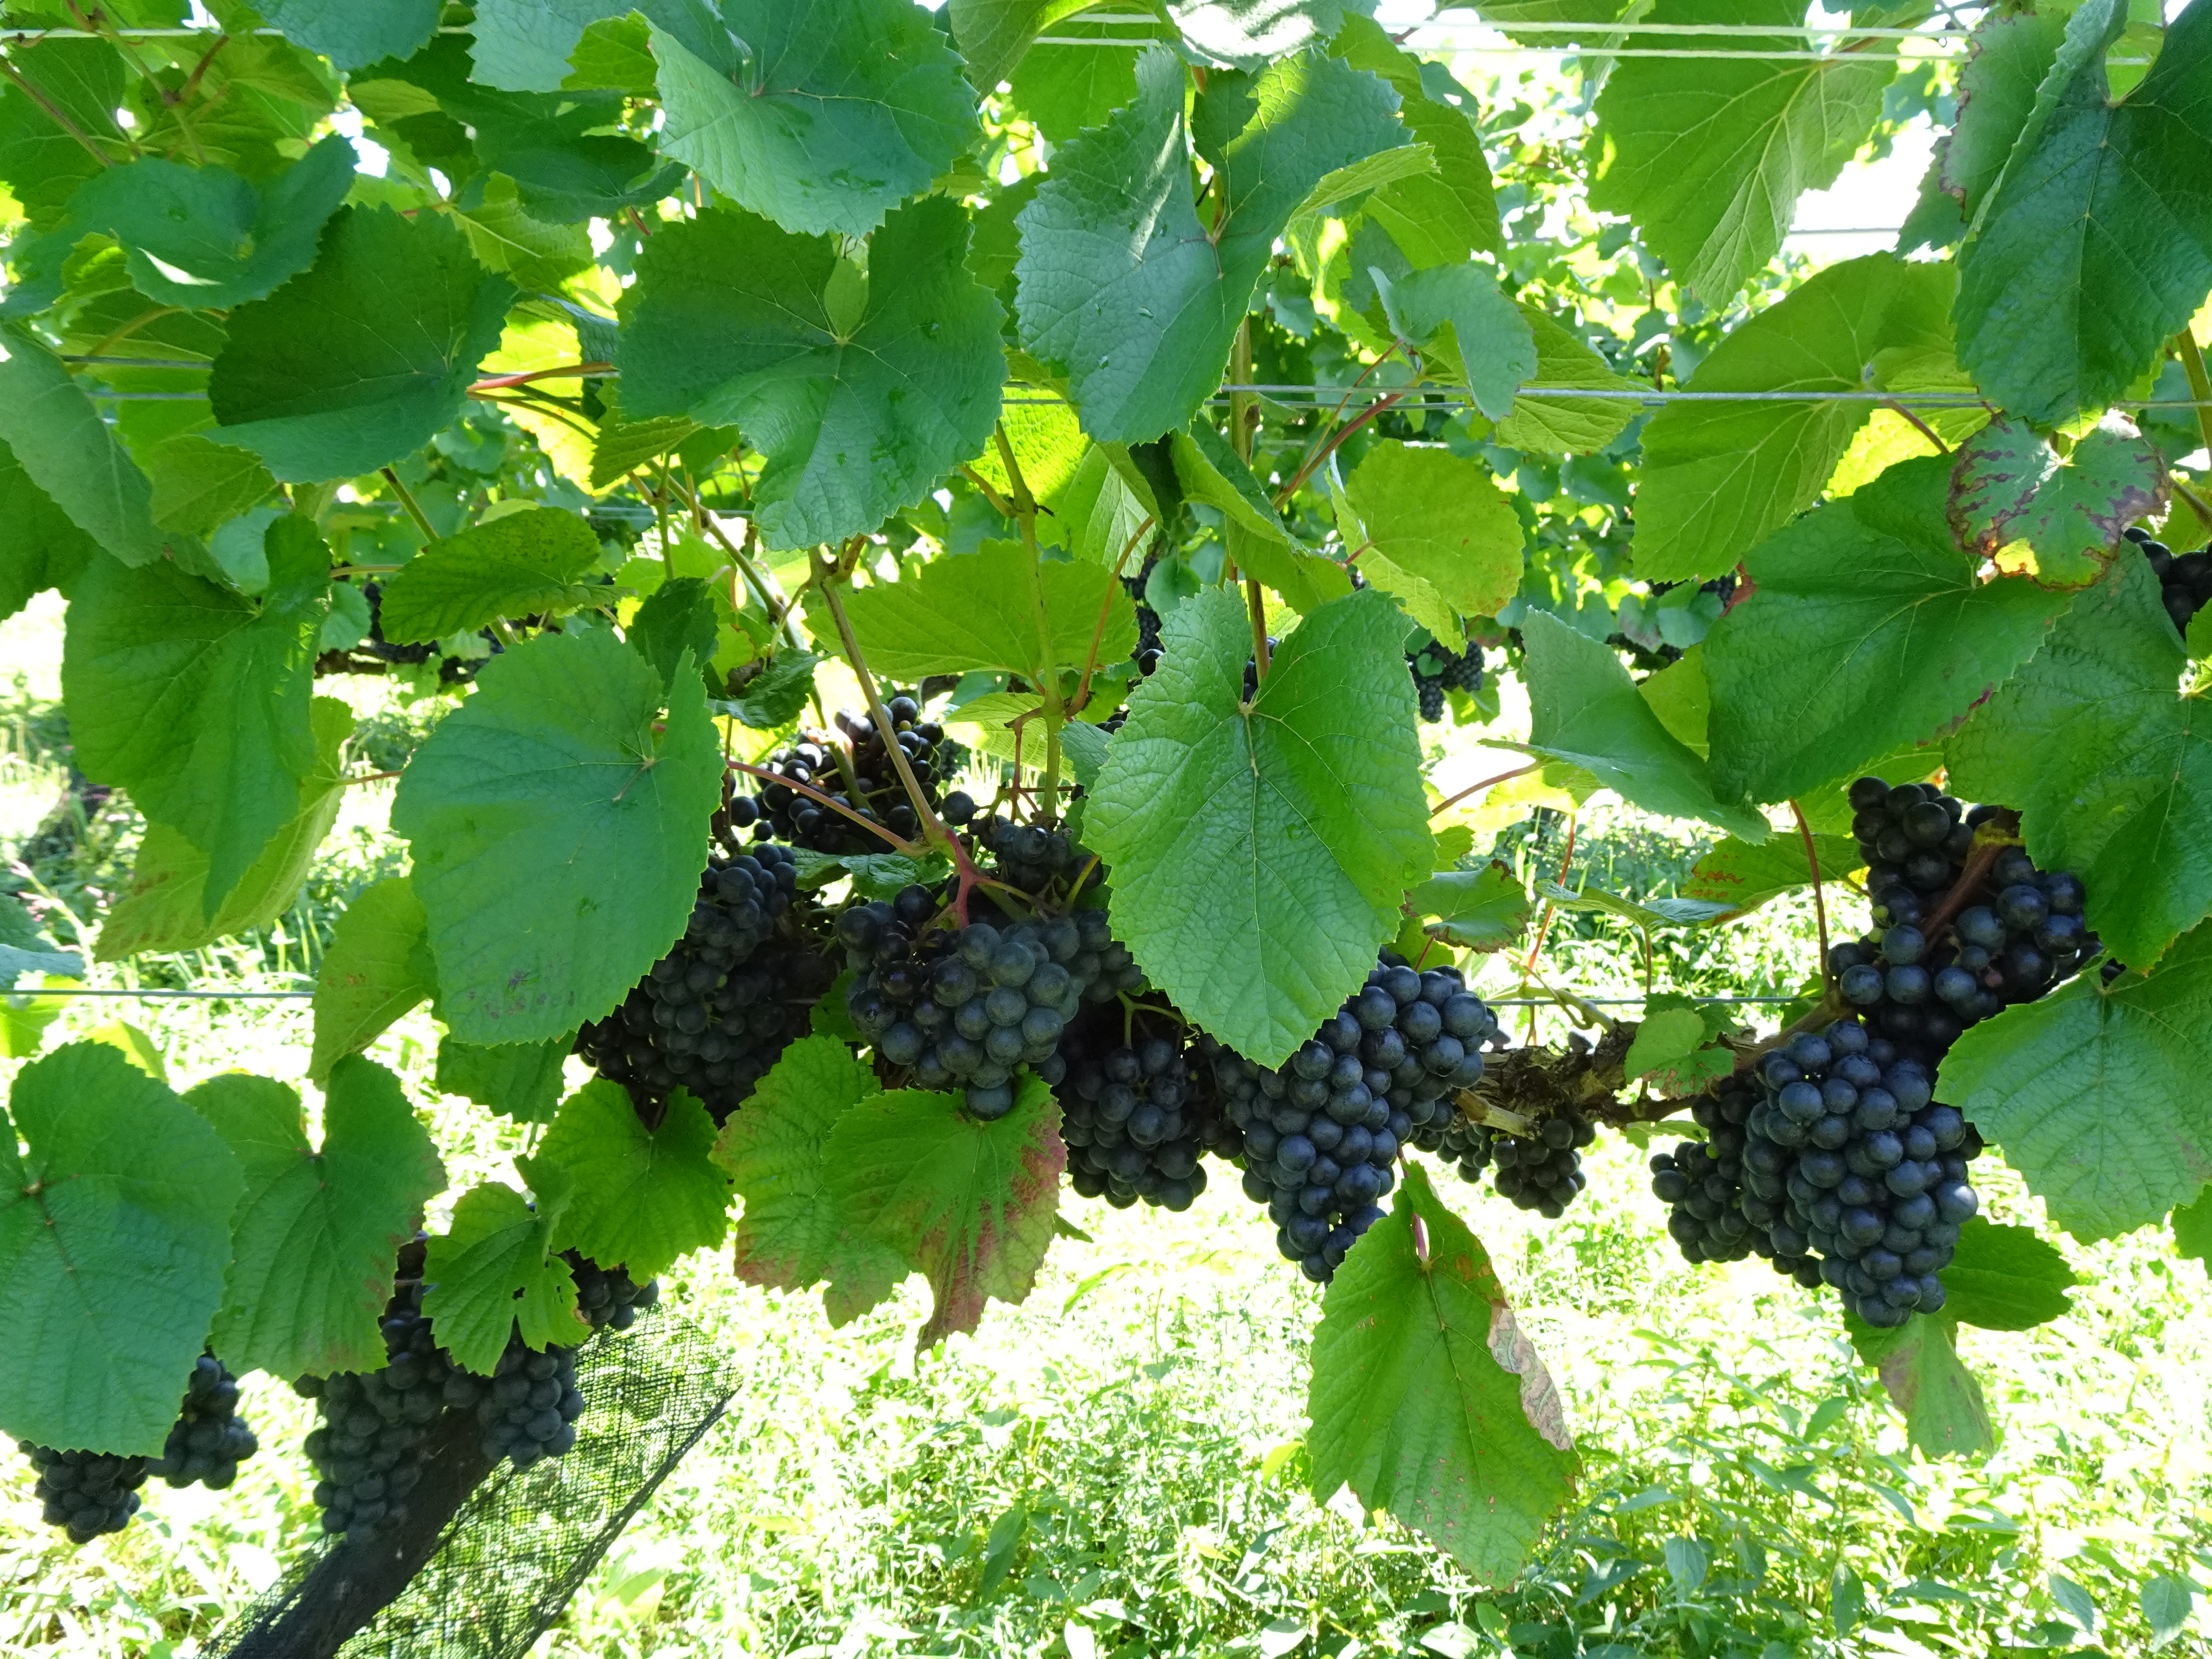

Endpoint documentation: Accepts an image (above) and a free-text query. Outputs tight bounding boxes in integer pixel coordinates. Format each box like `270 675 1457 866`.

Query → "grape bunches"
1649 1143 1750 1264
555 1246 657 1331
1198 948 1499 1282
18 1439 149 1544
1095 709 1132 734
644 844 796 1116
1025 910 1147 1002
143 1345 257 1489
720 774 773 842
1242 636 1280 687
2124 526 2212 642
1129 649 1164 693
834 884 1078 1121
475 1324 585 1468
941 791 1103 935
1743 1021 1981 1327
1436 1123 1502 1182
752 697 944 856
1491 1114 1595 1218
1826 844 2098 1051
569 975 679 1128
1847 777 1997 913
1055 1022 1243 1211
1691 1076 1824 1288
293 1369 428 1552
374 1278 480 1424
761 894 869 1038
